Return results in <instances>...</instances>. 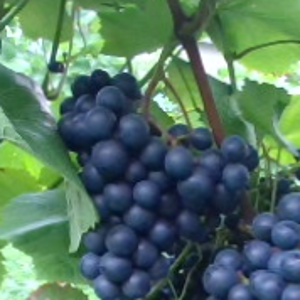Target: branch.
<instances>
[{
	"instance_id": "1",
	"label": "branch",
	"mask_w": 300,
	"mask_h": 300,
	"mask_svg": "<svg viewBox=\"0 0 300 300\" xmlns=\"http://www.w3.org/2000/svg\"><path fill=\"white\" fill-rule=\"evenodd\" d=\"M214 4L215 0H205L202 6L195 11L190 19L189 17H185L174 0L168 2V12L175 37L169 42L161 55L157 75L159 77L165 75L168 58L173 49L180 42L188 51V57L192 66V76L194 78L196 90L200 95L203 109L207 115L209 130L212 133V141L215 146L221 147L222 141L224 140V120L221 118L217 109L213 91L208 80L207 71L202 62L203 57L200 48L196 43L198 31L209 17Z\"/></svg>"
},
{
	"instance_id": "2",
	"label": "branch",
	"mask_w": 300,
	"mask_h": 300,
	"mask_svg": "<svg viewBox=\"0 0 300 300\" xmlns=\"http://www.w3.org/2000/svg\"><path fill=\"white\" fill-rule=\"evenodd\" d=\"M240 206L247 222L253 224L258 212L253 204L252 197L248 193H245L240 199Z\"/></svg>"
}]
</instances>
